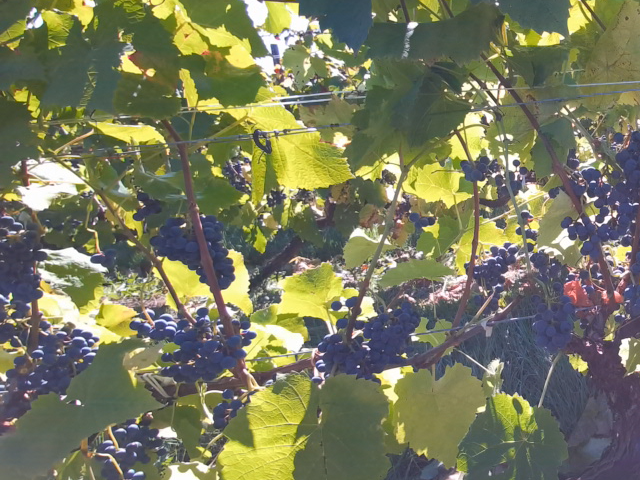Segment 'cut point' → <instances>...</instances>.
<instances>
[{
	"instance_id": "obj_1",
	"label": "cut point",
	"mask_w": 640,
	"mask_h": 480,
	"mask_svg": "<svg viewBox=\"0 0 640 480\" xmlns=\"http://www.w3.org/2000/svg\"><path fill=\"white\" fill-rule=\"evenodd\" d=\"M155 267H156V263H153V264H152V266H151V267H150V269H149V272H148V274H147V276H146L145 280L143 281V283H142V285H141V288H140V291H139V298H140V300H141V304H144V298H143V295H144V291H143V290H144V287H145V285L147 284V282H148L149 278L151 277L152 271L155 269Z\"/></svg>"
},
{
	"instance_id": "obj_2",
	"label": "cut point",
	"mask_w": 640,
	"mask_h": 480,
	"mask_svg": "<svg viewBox=\"0 0 640 480\" xmlns=\"http://www.w3.org/2000/svg\"><path fill=\"white\" fill-rule=\"evenodd\" d=\"M96 195H97V192H94V193L92 194L91 198H90L88 215H87V218H86V221H85V229H86L87 231H89V232H93V229H92V228H89L88 223H89V220H90V217H91L92 204H93V201H94V198H95V196H96Z\"/></svg>"
},
{
	"instance_id": "obj_3",
	"label": "cut point",
	"mask_w": 640,
	"mask_h": 480,
	"mask_svg": "<svg viewBox=\"0 0 640 480\" xmlns=\"http://www.w3.org/2000/svg\"><path fill=\"white\" fill-rule=\"evenodd\" d=\"M366 292L371 294L372 296H374L377 299V301L379 302L380 305L384 304V300H383L382 296L378 292H376L375 290L370 288L369 286L367 287Z\"/></svg>"
},
{
	"instance_id": "obj_4",
	"label": "cut point",
	"mask_w": 640,
	"mask_h": 480,
	"mask_svg": "<svg viewBox=\"0 0 640 480\" xmlns=\"http://www.w3.org/2000/svg\"><path fill=\"white\" fill-rule=\"evenodd\" d=\"M477 243L480 244L479 246V251H478V255H485V249H484V245L486 246H492V243L489 242H482L481 240H477Z\"/></svg>"
},
{
	"instance_id": "obj_5",
	"label": "cut point",
	"mask_w": 640,
	"mask_h": 480,
	"mask_svg": "<svg viewBox=\"0 0 640 480\" xmlns=\"http://www.w3.org/2000/svg\"><path fill=\"white\" fill-rule=\"evenodd\" d=\"M532 280L537 282L541 286L542 290L544 291L545 297H548V291L545 287V283H543L540 279L536 277H532Z\"/></svg>"
}]
</instances>
